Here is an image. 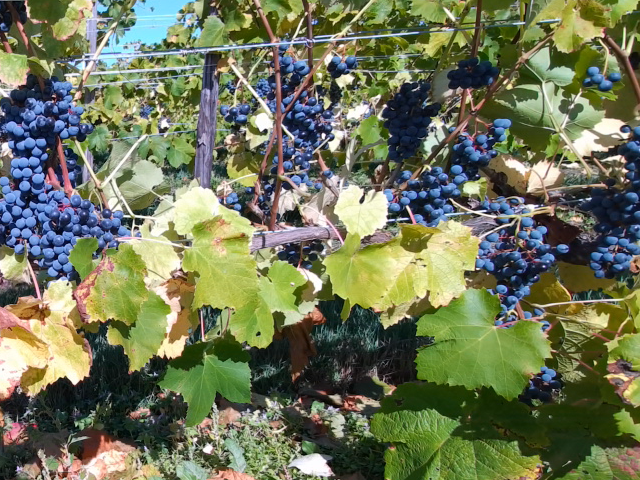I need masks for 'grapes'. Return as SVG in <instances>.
<instances>
[{
	"instance_id": "34c12dc5",
	"label": "grapes",
	"mask_w": 640,
	"mask_h": 480,
	"mask_svg": "<svg viewBox=\"0 0 640 480\" xmlns=\"http://www.w3.org/2000/svg\"><path fill=\"white\" fill-rule=\"evenodd\" d=\"M0 16L2 17L0 30L10 32L12 30L13 16L10 14L6 3L0 4Z\"/></svg>"
},
{
	"instance_id": "b958b902",
	"label": "grapes",
	"mask_w": 640,
	"mask_h": 480,
	"mask_svg": "<svg viewBox=\"0 0 640 480\" xmlns=\"http://www.w3.org/2000/svg\"><path fill=\"white\" fill-rule=\"evenodd\" d=\"M634 139L618 146V153L625 156V178L632 181L628 189L606 190L594 188L591 202L582 210L591 212L601 223L594 226L596 233L606 232L604 242L597 251L589 253V267L597 279L612 281L617 273L629 271L633 256L640 254V126L633 128Z\"/></svg>"
},
{
	"instance_id": "f8a65327",
	"label": "grapes",
	"mask_w": 640,
	"mask_h": 480,
	"mask_svg": "<svg viewBox=\"0 0 640 480\" xmlns=\"http://www.w3.org/2000/svg\"><path fill=\"white\" fill-rule=\"evenodd\" d=\"M417 83H404L400 93H396L394 100L387 102L388 108L381 112L382 118L388 120L382 123L383 128H389L392 137L387 139L388 158L394 163H402L413 155L416 148L422 144L418 137L427 135L431 118L441 109L439 102H434L421 108L422 102L431 90L430 83H423L420 90H415Z\"/></svg>"
},
{
	"instance_id": "e5b3c951",
	"label": "grapes",
	"mask_w": 640,
	"mask_h": 480,
	"mask_svg": "<svg viewBox=\"0 0 640 480\" xmlns=\"http://www.w3.org/2000/svg\"><path fill=\"white\" fill-rule=\"evenodd\" d=\"M289 48L290 45L278 47L281 74L283 76H286L287 74L292 73V75L290 76V81L288 83L283 82L281 84V98L283 99L281 101L282 110L287 105L293 93L295 92V87H298L301 84L302 76H306L311 69V66H309L304 60H298L296 62L292 56H283Z\"/></svg>"
},
{
	"instance_id": "91a60905",
	"label": "grapes",
	"mask_w": 640,
	"mask_h": 480,
	"mask_svg": "<svg viewBox=\"0 0 640 480\" xmlns=\"http://www.w3.org/2000/svg\"><path fill=\"white\" fill-rule=\"evenodd\" d=\"M357 66L358 60L355 56H348L344 60V63H342L340 57L334 56L327 65V72L330 73L333 78H339L341 75L348 74L351 69Z\"/></svg>"
},
{
	"instance_id": "30abb646",
	"label": "grapes",
	"mask_w": 640,
	"mask_h": 480,
	"mask_svg": "<svg viewBox=\"0 0 640 480\" xmlns=\"http://www.w3.org/2000/svg\"><path fill=\"white\" fill-rule=\"evenodd\" d=\"M543 314H544V310L540 308H534L533 313H531L530 311L523 312L525 319H532L534 315H543Z\"/></svg>"
},
{
	"instance_id": "dcf779d0",
	"label": "grapes",
	"mask_w": 640,
	"mask_h": 480,
	"mask_svg": "<svg viewBox=\"0 0 640 480\" xmlns=\"http://www.w3.org/2000/svg\"><path fill=\"white\" fill-rule=\"evenodd\" d=\"M64 155L66 157H69L66 161L67 171L70 177L72 188H76L78 175L82 173V166L80 163H77L78 155L76 153H73V150L71 148H66L64 150Z\"/></svg>"
},
{
	"instance_id": "802abce8",
	"label": "grapes",
	"mask_w": 640,
	"mask_h": 480,
	"mask_svg": "<svg viewBox=\"0 0 640 480\" xmlns=\"http://www.w3.org/2000/svg\"><path fill=\"white\" fill-rule=\"evenodd\" d=\"M301 248L298 244H286L282 250L277 253L280 260H288L289 264L294 267L298 266Z\"/></svg>"
},
{
	"instance_id": "0513c4c2",
	"label": "grapes",
	"mask_w": 640,
	"mask_h": 480,
	"mask_svg": "<svg viewBox=\"0 0 640 480\" xmlns=\"http://www.w3.org/2000/svg\"><path fill=\"white\" fill-rule=\"evenodd\" d=\"M513 126L511 119L502 118L495 119L491 127V133L494 137H488L486 134H478L476 136L477 144L471 140L469 133H461L458 143L452 146L453 153L450 156L452 161L450 172L454 176L452 182L442 184L450 180V175L444 173V169L439 166H432L430 171H425L421 180L428 191L408 190L402 191L399 202H392L395 194L391 188L384 189V195L388 202V210L392 213H400L403 205L408 206L412 201L419 199H434L431 203L423 205V213L431 217L426 221V217L422 213H415L414 220L416 223L424 225L426 228L437 227L440 221H447L446 214L456 212V208L451 203H446L448 199L458 198L461 190L458 185L464 182L478 181L480 179L479 167H487L491 162V158L497 156V151L492 148L496 142L506 139V130Z\"/></svg>"
},
{
	"instance_id": "54f908b8",
	"label": "grapes",
	"mask_w": 640,
	"mask_h": 480,
	"mask_svg": "<svg viewBox=\"0 0 640 480\" xmlns=\"http://www.w3.org/2000/svg\"><path fill=\"white\" fill-rule=\"evenodd\" d=\"M249 110L250 106L248 104L237 105L233 108L230 105H221L219 108V114L224 116V121L226 123L236 121L240 125H244L248 122L247 114Z\"/></svg>"
},
{
	"instance_id": "9fbda902",
	"label": "grapes",
	"mask_w": 640,
	"mask_h": 480,
	"mask_svg": "<svg viewBox=\"0 0 640 480\" xmlns=\"http://www.w3.org/2000/svg\"><path fill=\"white\" fill-rule=\"evenodd\" d=\"M312 250H316L317 252H322L324 250V246L322 244H316V245H311L310 247L308 246H304L303 247V255L304 256H308V260L309 261H315L317 259V254L316 253H311ZM309 261H302L301 262V267L304 269H311L312 268V263Z\"/></svg>"
},
{
	"instance_id": "10d88ff6",
	"label": "grapes",
	"mask_w": 640,
	"mask_h": 480,
	"mask_svg": "<svg viewBox=\"0 0 640 480\" xmlns=\"http://www.w3.org/2000/svg\"><path fill=\"white\" fill-rule=\"evenodd\" d=\"M54 173H55V178L58 181V183L60 185H64L65 184V180L63 179V174H62V170H61V164H55L54 165Z\"/></svg>"
},
{
	"instance_id": "83beee25",
	"label": "grapes",
	"mask_w": 640,
	"mask_h": 480,
	"mask_svg": "<svg viewBox=\"0 0 640 480\" xmlns=\"http://www.w3.org/2000/svg\"><path fill=\"white\" fill-rule=\"evenodd\" d=\"M519 317L515 314H509L505 320H495L494 325L500 326L501 329H509L512 326L511 321H518Z\"/></svg>"
},
{
	"instance_id": "4a4d1313",
	"label": "grapes",
	"mask_w": 640,
	"mask_h": 480,
	"mask_svg": "<svg viewBox=\"0 0 640 480\" xmlns=\"http://www.w3.org/2000/svg\"><path fill=\"white\" fill-rule=\"evenodd\" d=\"M270 180H271V177L269 175H266L262 179L263 189L265 190V192L264 194H260L258 196V200L261 203H270L272 201V198L270 196H272L276 191V188L271 183H269Z\"/></svg>"
},
{
	"instance_id": "83cd7487",
	"label": "grapes",
	"mask_w": 640,
	"mask_h": 480,
	"mask_svg": "<svg viewBox=\"0 0 640 480\" xmlns=\"http://www.w3.org/2000/svg\"><path fill=\"white\" fill-rule=\"evenodd\" d=\"M500 73L498 67H492L490 60H482L479 63L478 57L469 60H460L457 70H450L447 78L450 80L447 84L449 90L476 89L484 86H491L494 78Z\"/></svg>"
},
{
	"instance_id": "62ce99fe",
	"label": "grapes",
	"mask_w": 640,
	"mask_h": 480,
	"mask_svg": "<svg viewBox=\"0 0 640 480\" xmlns=\"http://www.w3.org/2000/svg\"><path fill=\"white\" fill-rule=\"evenodd\" d=\"M11 3L13 4L14 8L17 10V13L19 15V21L22 23V25H24L27 21V11H26V6L24 5V1L11 0Z\"/></svg>"
},
{
	"instance_id": "5460f4e3",
	"label": "grapes",
	"mask_w": 640,
	"mask_h": 480,
	"mask_svg": "<svg viewBox=\"0 0 640 480\" xmlns=\"http://www.w3.org/2000/svg\"><path fill=\"white\" fill-rule=\"evenodd\" d=\"M308 96V92L303 90L300 92L297 100L287 113L283 125L285 129L293 136L294 145L289 146V136L286 131L282 132L283 143V167L292 169L295 165L301 170H309L311 168L310 159L314 155L315 148L321 145V149L326 151L329 148L327 142L323 143L322 133L325 135V141H331L334 138L333 127L330 124L315 122L314 117L321 113V116L330 120L333 113L330 110H324L317 99L312 96L306 99V105L302 101Z\"/></svg>"
},
{
	"instance_id": "1ff8f66d",
	"label": "grapes",
	"mask_w": 640,
	"mask_h": 480,
	"mask_svg": "<svg viewBox=\"0 0 640 480\" xmlns=\"http://www.w3.org/2000/svg\"><path fill=\"white\" fill-rule=\"evenodd\" d=\"M520 201L522 203L526 202V198L523 196H520L519 199H515V198H510L509 199V203H507L506 199L504 196H498L496 198V202L495 201H491L490 200V196L486 195L485 196V201L482 202V209H489L491 210L493 213H501L502 215H513L514 214V210L513 207L511 205L514 204H519Z\"/></svg>"
},
{
	"instance_id": "2adb6a1f",
	"label": "grapes",
	"mask_w": 640,
	"mask_h": 480,
	"mask_svg": "<svg viewBox=\"0 0 640 480\" xmlns=\"http://www.w3.org/2000/svg\"><path fill=\"white\" fill-rule=\"evenodd\" d=\"M541 371L544 372L541 375V379L533 378L529 382V386L526 389V396L529 399H539L541 402H547L551 398L552 389H559L562 387V382L558 379V373L548 366H542Z\"/></svg>"
},
{
	"instance_id": "ef6de9ee",
	"label": "grapes",
	"mask_w": 640,
	"mask_h": 480,
	"mask_svg": "<svg viewBox=\"0 0 640 480\" xmlns=\"http://www.w3.org/2000/svg\"><path fill=\"white\" fill-rule=\"evenodd\" d=\"M586 75L588 77L582 80V85L584 87H591L594 84H598V89L601 92H609L613 87V82H619L621 80V74L619 72L610 73L608 78L604 77L597 66H589L586 69Z\"/></svg>"
},
{
	"instance_id": "84f90ec7",
	"label": "grapes",
	"mask_w": 640,
	"mask_h": 480,
	"mask_svg": "<svg viewBox=\"0 0 640 480\" xmlns=\"http://www.w3.org/2000/svg\"><path fill=\"white\" fill-rule=\"evenodd\" d=\"M522 228H534L530 233L528 229H521L517 232V238L526 243L528 250L537 249L536 261L532 262L530 257H523L520 250L509 252L496 251L491 244L495 243L497 250H506L508 243L499 238L506 237L508 230L501 228L496 233H490L478 245V257L474 260L477 269H485L489 274H493L496 280L495 290L488 288L487 292L492 296L501 294V308L499 317L511 312L517 304L531 293V286L540 282V272H547L550 265L555 261V255L551 253V245L543 243L545 236L549 233V228L545 225H537V221L530 217L520 219Z\"/></svg>"
},
{
	"instance_id": "012428b0",
	"label": "grapes",
	"mask_w": 640,
	"mask_h": 480,
	"mask_svg": "<svg viewBox=\"0 0 640 480\" xmlns=\"http://www.w3.org/2000/svg\"><path fill=\"white\" fill-rule=\"evenodd\" d=\"M290 180L296 185L300 186L301 184H305L308 187H312L313 189L321 190L323 185L320 182H313L309 179V175L306 171H302L301 173H295L290 177Z\"/></svg>"
},
{
	"instance_id": "23402543",
	"label": "grapes",
	"mask_w": 640,
	"mask_h": 480,
	"mask_svg": "<svg viewBox=\"0 0 640 480\" xmlns=\"http://www.w3.org/2000/svg\"><path fill=\"white\" fill-rule=\"evenodd\" d=\"M413 174L411 169H403L396 177L395 182L397 184H403L408 181V187L411 189H417L420 187V182L418 180H410L411 175Z\"/></svg>"
},
{
	"instance_id": "01657485",
	"label": "grapes",
	"mask_w": 640,
	"mask_h": 480,
	"mask_svg": "<svg viewBox=\"0 0 640 480\" xmlns=\"http://www.w3.org/2000/svg\"><path fill=\"white\" fill-rule=\"evenodd\" d=\"M73 84L52 76L45 92L34 74L27 76L23 89H12L10 98L0 99V134L10 139L9 175L18 181V189L10 187L7 176L0 178V243L14 249L16 255L27 251L39 260L41 268L56 279L77 280L79 273L68 261L71 249L82 237H97L98 246L118 248L114 236L129 238L131 231L122 226L124 213L109 209L101 212V221L93 214L95 206L80 195L70 198L65 192L51 190L43 169L49 159L45 151L57 147V137H76L84 142L93 131L91 123H80L82 107L72 102Z\"/></svg>"
}]
</instances>
